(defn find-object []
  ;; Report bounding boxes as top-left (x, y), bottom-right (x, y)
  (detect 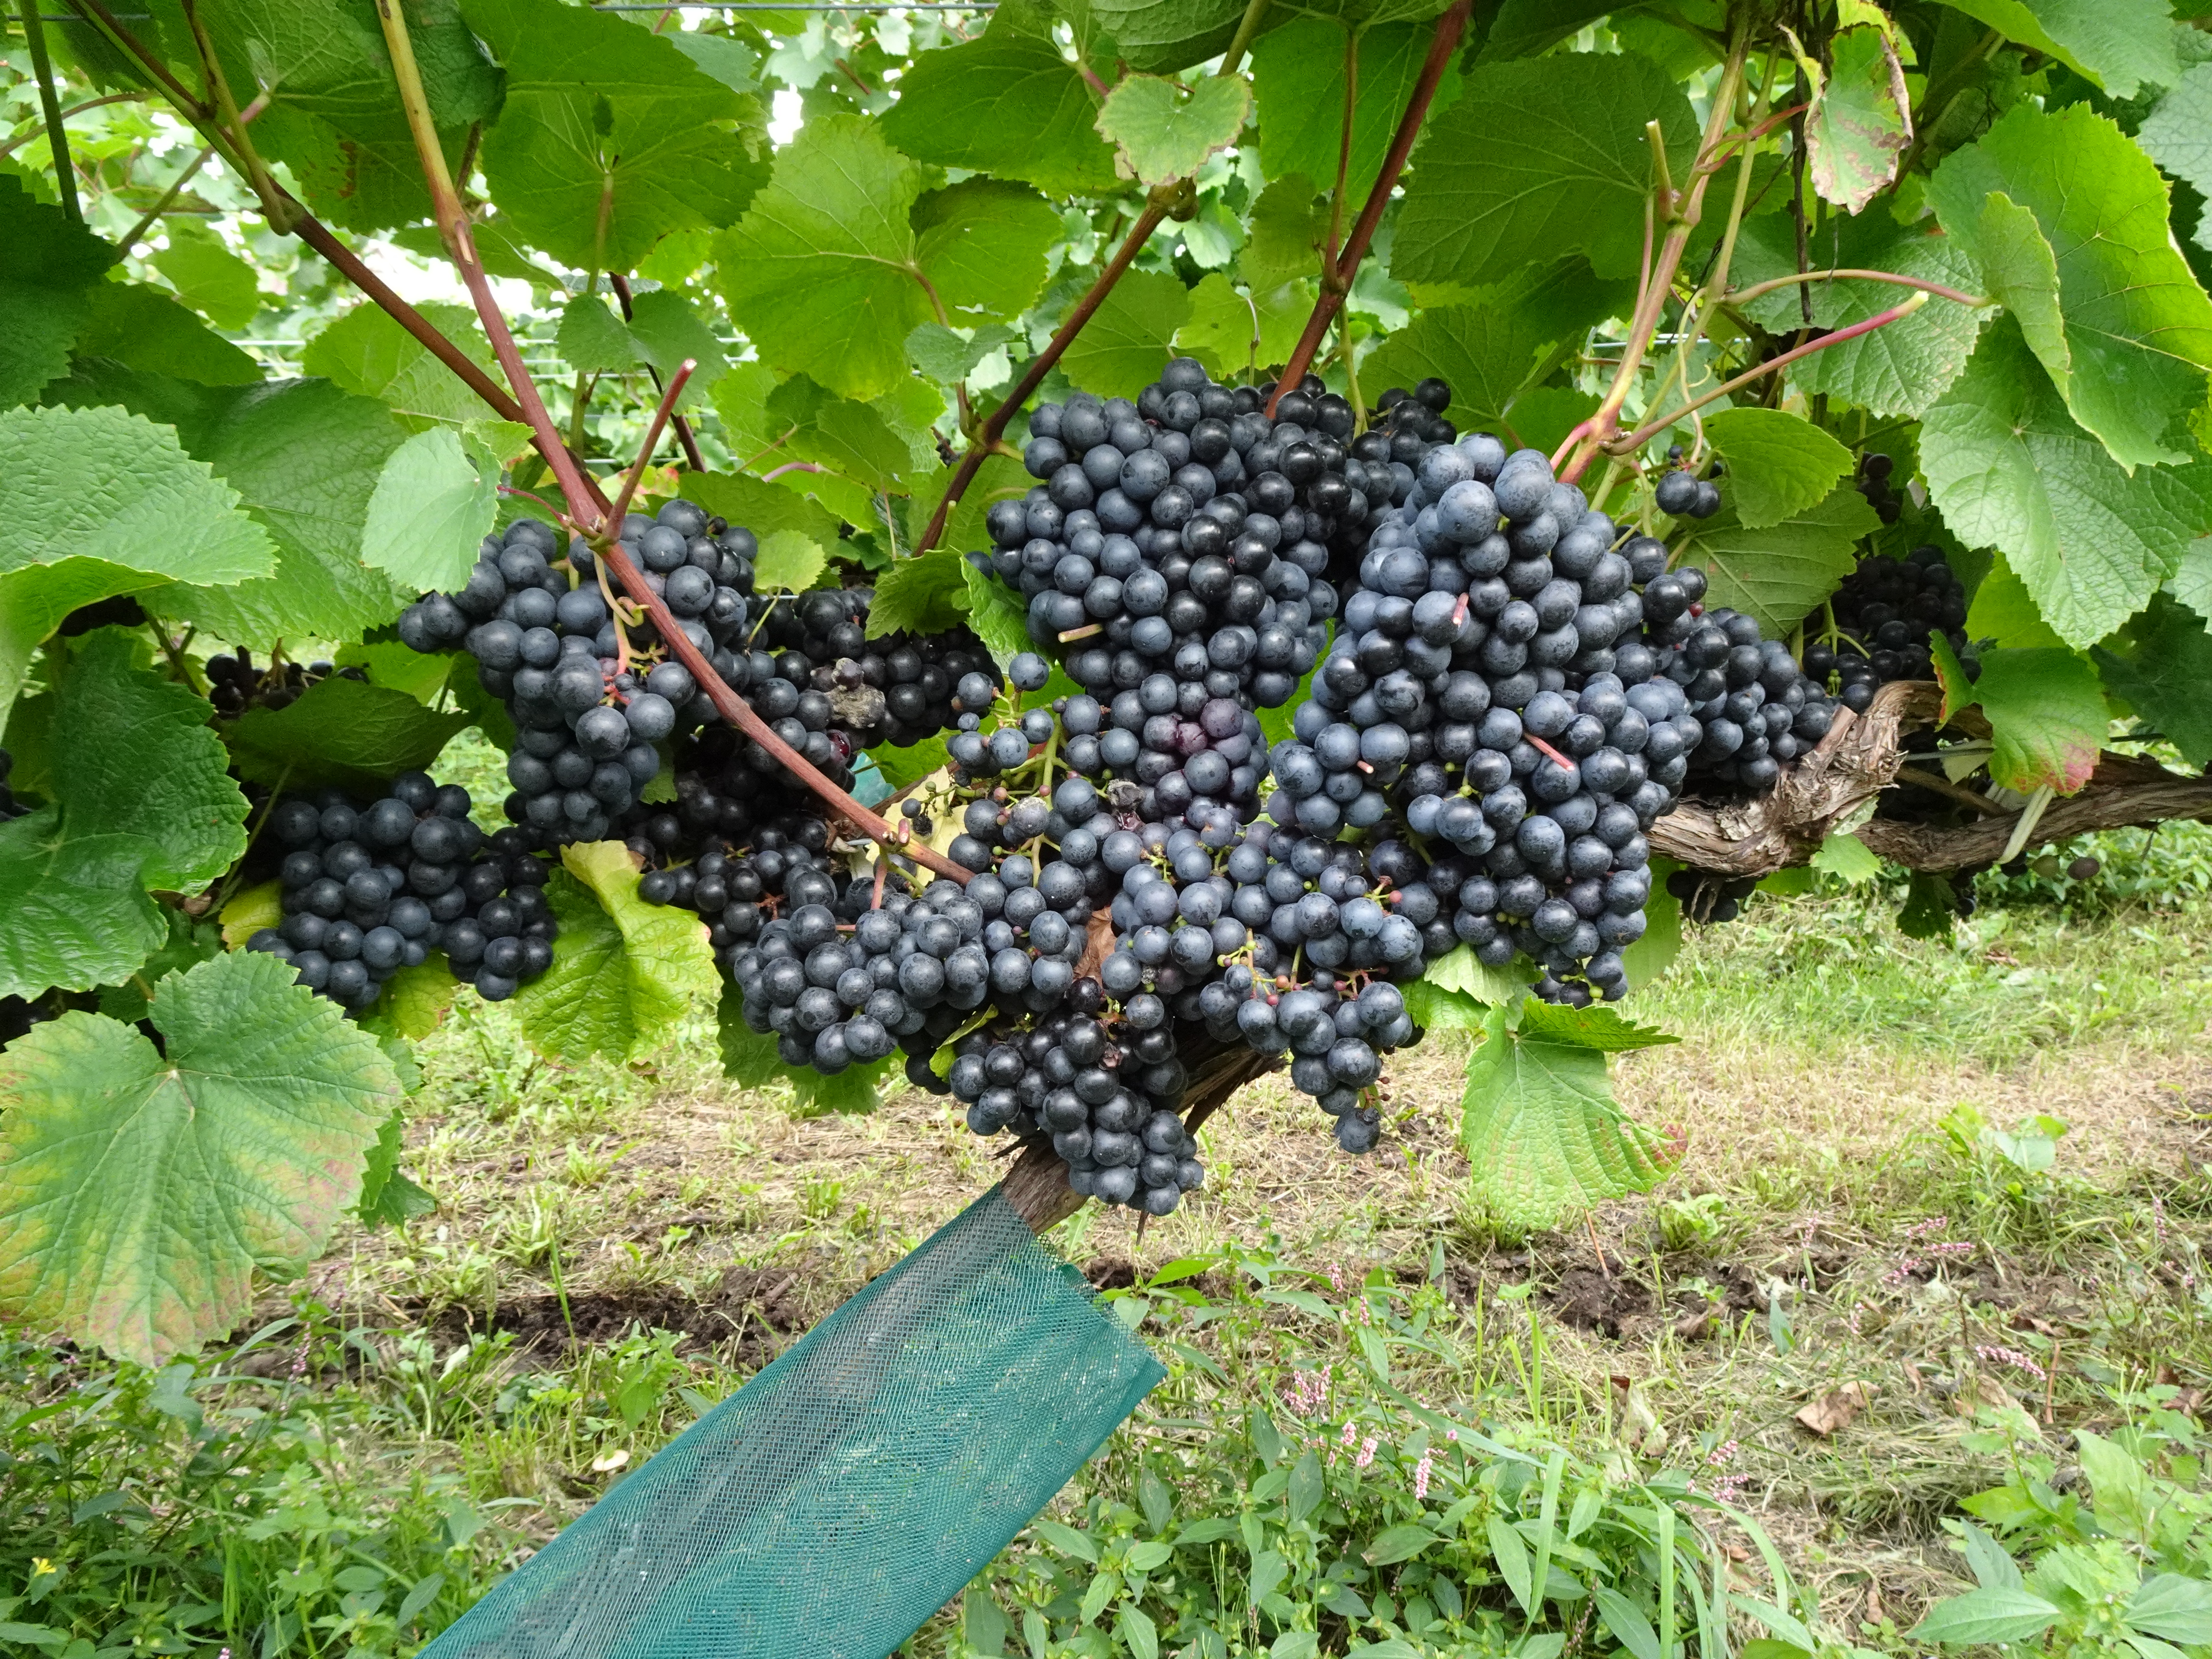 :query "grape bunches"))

top-left (626, 812), bottom-right (832, 968)
top-left (601, 717), bottom-right (806, 842)
top-left (901, 782), bottom-right (935, 835)
top-left (205, 653), bottom-right (371, 720)
top-left (55, 593), bottom-right (149, 636)
top-left (1657, 445), bottom-right (1724, 519)
top-left (726, 649), bottom-right (853, 792)
top-left (442, 826), bottom-right (561, 1001)
top-left (1801, 603), bottom-right (1982, 714)
top-left (1803, 544), bottom-right (1977, 647)
top-left (1405, 675), bottom-right (1703, 1012)
top-left (1267, 826), bottom-right (1467, 978)
top-left (1410, 428), bottom-right (1656, 724)
top-left (1102, 808), bottom-right (1236, 1029)
top-left (1263, 513), bottom-right (1431, 839)
top-left (949, 978), bottom-right (1203, 1215)
top-left (741, 585), bottom-right (809, 653)
top-left (399, 498), bottom-right (758, 847)
top-left (1666, 867), bottom-right (1756, 925)
top-left (734, 879), bottom-right (988, 1075)
top-left (243, 770), bottom-right (483, 1021)
top-left (0, 747), bottom-right (13, 813)
top-left (986, 357), bottom-right (1416, 832)
top-left (961, 775), bottom-right (1118, 1013)
top-left (1278, 977), bottom-right (1427, 1153)
top-left (1367, 377), bottom-right (1456, 446)
top-left (965, 551), bottom-right (994, 581)
top-left (1200, 821), bottom-right (1291, 1058)
top-left (1684, 607), bottom-right (1835, 788)
top-left (897, 1000), bottom-right (964, 1095)
top-left (1617, 527), bottom-right (1730, 700)
top-left (946, 652), bottom-right (1055, 778)
top-left (804, 590), bottom-right (1004, 750)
